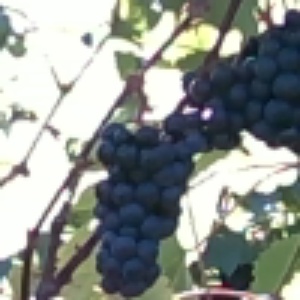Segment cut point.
I'll use <instances>...</instances> for the list:
<instances>
[{
    "instance_id": "cut-point-1",
    "label": "cut point",
    "mask_w": 300,
    "mask_h": 300,
    "mask_svg": "<svg viewBox=\"0 0 300 300\" xmlns=\"http://www.w3.org/2000/svg\"><path fill=\"white\" fill-rule=\"evenodd\" d=\"M133 93L140 98L137 117L124 120L122 122V125L127 126L131 124H136L141 126L142 128H154L155 127L154 123L144 119V115L147 107V95L145 93V83L141 82L140 85L133 90Z\"/></svg>"
}]
</instances>
